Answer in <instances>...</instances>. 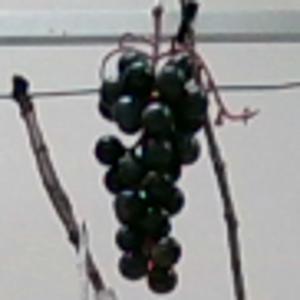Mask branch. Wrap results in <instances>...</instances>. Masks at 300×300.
Segmentation results:
<instances>
[{
  "label": "branch",
  "mask_w": 300,
  "mask_h": 300,
  "mask_svg": "<svg viewBox=\"0 0 300 300\" xmlns=\"http://www.w3.org/2000/svg\"><path fill=\"white\" fill-rule=\"evenodd\" d=\"M11 82L12 97L18 106L19 117L24 120L31 153L39 169L42 189L56 212L63 234L69 237L75 256L89 279L96 299L119 300L118 294L112 288H107L102 273L96 269L82 238L76 211L67 188L51 164L47 146L42 137L40 120L31 93H29L30 83L23 75L19 74H14Z\"/></svg>",
  "instance_id": "1"
},
{
  "label": "branch",
  "mask_w": 300,
  "mask_h": 300,
  "mask_svg": "<svg viewBox=\"0 0 300 300\" xmlns=\"http://www.w3.org/2000/svg\"><path fill=\"white\" fill-rule=\"evenodd\" d=\"M207 141L209 171L216 177L222 216L225 225V239L229 259V282L232 300H247L246 282L240 268V226L234 204L233 188L226 173V162L222 159V144L215 129L212 127L210 114L207 125L202 128Z\"/></svg>",
  "instance_id": "2"
},
{
  "label": "branch",
  "mask_w": 300,
  "mask_h": 300,
  "mask_svg": "<svg viewBox=\"0 0 300 300\" xmlns=\"http://www.w3.org/2000/svg\"><path fill=\"white\" fill-rule=\"evenodd\" d=\"M201 3L198 0H179V27L173 32V39L176 41L181 50H187L194 55L199 63L198 73L192 78V82L202 85V68L199 57L195 52L196 47V30L194 21L200 14Z\"/></svg>",
  "instance_id": "3"
}]
</instances>
